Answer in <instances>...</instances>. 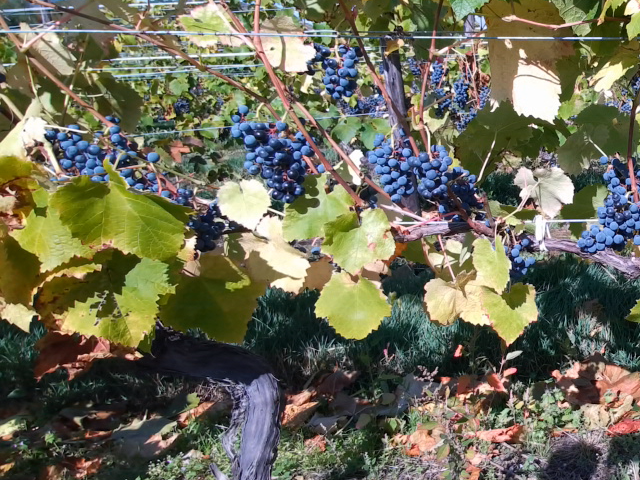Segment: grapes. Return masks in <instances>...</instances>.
Segmentation results:
<instances>
[{
    "instance_id": "1",
    "label": "grapes",
    "mask_w": 640,
    "mask_h": 480,
    "mask_svg": "<svg viewBox=\"0 0 640 480\" xmlns=\"http://www.w3.org/2000/svg\"><path fill=\"white\" fill-rule=\"evenodd\" d=\"M375 150H368L365 153V159L374 166V173L380 176V183L384 186V190L391 194L392 202L397 203L404 198H409L415 192V184L410 178L412 172L414 176L421 180L416 185V192L425 199L438 197L442 200L439 203V213H446L448 203V190L446 184L448 181L456 179L460 175L465 174L468 184L452 185L451 191L461 200V207L465 211H469L470 207L483 210L484 204L477 201L474 196L478 192V188L474 183L478 181L476 173H470L463 167H454L452 172H446L448 167L453 165V159L448 156V151L442 144H433L432 152H438V156L430 162L428 153H420L418 157L413 156V150L408 139L401 142V147L396 149L398 156L406 159L400 161L397 158H390L392 155L391 141L385 139L382 133H377L373 140Z\"/></svg>"
},
{
    "instance_id": "2",
    "label": "grapes",
    "mask_w": 640,
    "mask_h": 480,
    "mask_svg": "<svg viewBox=\"0 0 640 480\" xmlns=\"http://www.w3.org/2000/svg\"><path fill=\"white\" fill-rule=\"evenodd\" d=\"M249 113L246 105L238 107V113L231 115L233 124L229 128L232 140L243 138V148L247 151L243 168L250 175H258L267 179V186L274 189L271 198L274 201L292 204L299 196L305 194L303 175L306 173V162L303 155L314 157L315 153L309 147L300 131L295 132V139L291 141L283 137L288 124L282 120L275 122L278 132L270 134V126L265 122L245 121Z\"/></svg>"
},
{
    "instance_id": "3",
    "label": "grapes",
    "mask_w": 640,
    "mask_h": 480,
    "mask_svg": "<svg viewBox=\"0 0 640 480\" xmlns=\"http://www.w3.org/2000/svg\"><path fill=\"white\" fill-rule=\"evenodd\" d=\"M611 169L604 172L602 180L610 182L607 190L612 195H607L603 201L604 206L597 208L599 224L604 226L603 230L598 225H590L589 230L580 233L578 248H584L587 253L606 251L607 248L622 252L627 246V241L632 239L633 245H640V235H633L634 231H640V207L629 205L624 212H617V207L627 205L628 200L633 203V196L625 197L626 188L620 185L617 178L618 172L624 175V184L631 186L629 170L627 165L618 158L611 160Z\"/></svg>"
},
{
    "instance_id": "4",
    "label": "grapes",
    "mask_w": 640,
    "mask_h": 480,
    "mask_svg": "<svg viewBox=\"0 0 640 480\" xmlns=\"http://www.w3.org/2000/svg\"><path fill=\"white\" fill-rule=\"evenodd\" d=\"M121 131L120 125H112L108 130L110 144L118 148H111L112 153L110 154L97 145H90L87 140H83L82 134L72 133L70 138L65 132L48 130L44 133V137L48 141L59 142L63 158L58 160V165L66 170V175L73 176L74 171L71 169L74 167L80 175H90L92 182H108V174H98L106 172V169L102 167V161L105 157H107L110 166H114L119 159L117 168L131 165V162L127 161V159L132 160L129 155L138 157V152L128 147L127 139L119 134Z\"/></svg>"
},
{
    "instance_id": "5",
    "label": "grapes",
    "mask_w": 640,
    "mask_h": 480,
    "mask_svg": "<svg viewBox=\"0 0 640 480\" xmlns=\"http://www.w3.org/2000/svg\"><path fill=\"white\" fill-rule=\"evenodd\" d=\"M314 50L317 52L313 59L307 60V65H313L318 61H321V67L324 68V78L322 83L325 86L327 94L331 95L332 99H340L343 96L351 98L353 96V90L357 88V82L353 80L358 77V71L355 66L359 62V57L363 54L360 52L357 46L347 48L345 45L338 47V52L343 58V68L337 70V61L335 59H327L331 55L329 48L323 47L318 42L314 43Z\"/></svg>"
},
{
    "instance_id": "6",
    "label": "grapes",
    "mask_w": 640,
    "mask_h": 480,
    "mask_svg": "<svg viewBox=\"0 0 640 480\" xmlns=\"http://www.w3.org/2000/svg\"><path fill=\"white\" fill-rule=\"evenodd\" d=\"M218 201L214 200L209 203V208L205 214H198L197 219H191L187 223L198 235L195 249L201 253H208L216 249V243L213 240L221 236V231L225 228L228 217L222 215Z\"/></svg>"
},
{
    "instance_id": "7",
    "label": "grapes",
    "mask_w": 640,
    "mask_h": 480,
    "mask_svg": "<svg viewBox=\"0 0 640 480\" xmlns=\"http://www.w3.org/2000/svg\"><path fill=\"white\" fill-rule=\"evenodd\" d=\"M531 243V239H524L523 241H521V244H515L510 249L507 244L503 245L504 252L511 253V258L513 259L511 270L514 273H518L519 275H527L529 273L528 268L536 264V259L534 257H528L524 260L523 257L519 255V253L522 252L523 248L530 245Z\"/></svg>"
},
{
    "instance_id": "8",
    "label": "grapes",
    "mask_w": 640,
    "mask_h": 480,
    "mask_svg": "<svg viewBox=\"0 0 640 480\" xmlns=\"http://www.w3.org/2000/svg\"><path fill=\"white\" fill-rule=\"evenodd\" d=\"M120 176L125 177V182L127 185L133 187L134 189H141L142 191L149 190L153 194L158 193V181L156 179V174L154 172H147L145 174V178H134V169L127 168L120 170Z\"/></svg>"
},
{
    "instance_id": "9",
    "label": "grapes",
    "mask_w": 640,
    "mask_h": 480,
    "mask_svg": "<svg viewBox=\"0 0 640 480\" xmlns=\"http://www.w3.org/2000/svg\"><path fill=\"white\" fill-rule=\"evenodd\" d=\"M160 196L170 199L172 203L186 205L188 200L193 197V191L184 188H177L175 195L171 191L163 190L160 192Z\"/></svg>"
}]
</instances>
